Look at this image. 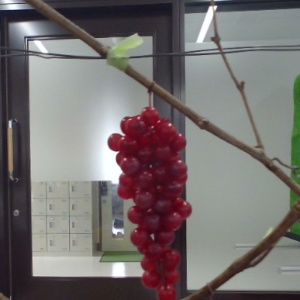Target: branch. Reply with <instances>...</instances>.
<instances>
[{"mask_svg":"<svg viewBox=\"0 0 300 300\" xmlns=\"http://www.w3.org/2000/svg\"><path fill=\"white\" fill-rule=\"evenodd\" d=\"M212 4V16H213V24H214V32L215 35L210 37V41L214 42L217 46L222 60L228 70L231 78L235 82L237 89L239 90L240 95L242 96L243 102L245 104V109L247 111V115L249 118V122L253 131V134L256 138L257 146H251L248 143L243 142L240 138L235 137L233 134L215 126L213 121L207 120L204 116L200 115L196 110L190 108L185 102L180 100L175 94H170L169 91L153 82L147 76L141 74L137 70L134 69L132 64L127 66V70H125V74L130 78L135 80L137 83H140L145 87L147 91H152L159 97L163 98L166 102L171 104L173 107L178 109L180 114L188 119L191 123L195 124L200 130L206 131L211 136L217 137L219 140L225 141L234 147L242 150L243 152L249 154L255 160L259 161L265 168L269 171L273 172L280 181L287 185L290 190L295 191L298 196H300V187L292 180V178L281 168L277 167L273 164V160L265 154V149L262 143L261 136L257 130L256 122L253 119V112L251 111L249 100L245 96L243 89L245 86V81L241 80L240 82L234 75L231 67L228 64V61L225 57L224 51L222 50L221 38L218 34L217 22H216V14H215V0H211Z\"/></svg>","mask_w":300,"mask_h":300,"instance_id":"branch-1","label":"branch"},{"mask_svg":"<svg viewBox=\"0 0 300 300\" xmlns=\"http://www.w3.org/2000/svg\"><path fill=\"white\" fill-rule=\"evenodd\" d=\"M300 219V202L293 207L292 210L285 215L279 226L267 237L263 242L259 243L253 250L245 255L236 258L230 265H228L223 272L218 274L213 280L206 282L200 289L189 294L187 298L181 300H206L208 299L219 287L224 286L228 280H231L241 271L247 267H254L259 264L268 255L274 251V243H277L283 236L288 239L300 241V236L287 229L291 228L295 222ZM267 251L263 256L259 257L256 261L254 259L261 253Z\"/></svg>","mask_w":300,"mask_h":300,"instance_id":"branch-2","label":"branch"},{"mask_svg":"<svg viewBox=\"0 0 300 300\" xmlns=\"http://www.w3.org/2000/svg\"><path fill=\"white\" fill-rule=\"evenodd\" d=\"M25 3H28L33 8L38 10L41 15L46 16L60 26L69 29L85 44L89 45L93 50L98 52L102 57H106L108 49H111V46L100 42L97 38L92 36V34L84 31L80 26L75 25L72 21L66 19L60 11L53 9L43 0H25Z\"/></svg>","mask_w":300,"mask_h":300,"instance_id":"branch-3","label":"branch"}]
</instances>
